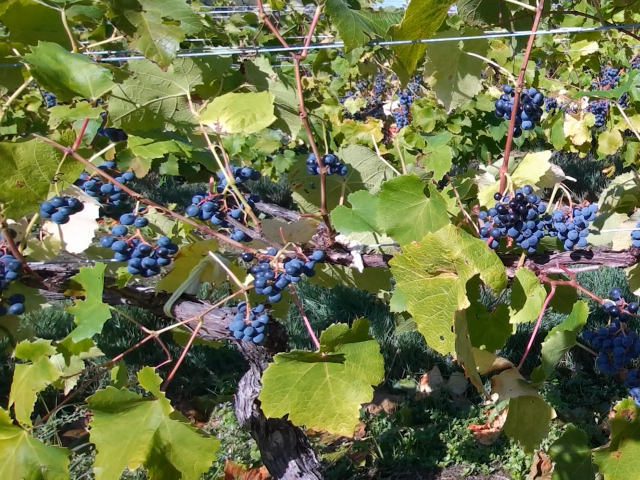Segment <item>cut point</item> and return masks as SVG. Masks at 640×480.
<instances>
[{
    "label": "cut point",
    "mask_w": 640,
    "mask_h": 480,
    "mask_svg": "<svg viewBox=\"0 0 640 480\" xmlns=\"http://www.w3.org/2000/svg\"><path fill=\"white\" fill-rule=\"evenodd\" d=\"M306 113H307L308 116L315 117V118L320 120V122L322 123V128H323L322 138H325L326 137V125H325V121H324L323 117H321L318 114H314V113H310V112H306Z\"/></svg>",
    "instance_id": "6a23745f"
},
{
    "label": "cut point",
    "mask_w": 640,
    "mask_h": 480,
    "mask_svg": "<svg viewBox=\"0 0 640 480\" xmlns=\"http://www.w3.org/2000/svg\"><path fill=\"white\" fill-rule=\"evenodd\" d=\"M67 156H68V153L66 152V153H64V154L62 155V157L60 158L59 163H58V165H57V167H56V173H59V169L61 168L62 164L65 162V160H66Z\"/></svg>",
    "instance_id": "7d7e1d6f"
},
{
    "label": "cut point",
    "mask_w": 640,
    "mask_h": 480,
    "mask_svg": "<svg viewBox=\"0 0 640 480\" xmlns=\"http://www.w3.org/2000/svg\"><path fill=\"white\" fill-rule=\"evenodd\" d=\"M560 189H561V190H563V191H565V192L567 193L568 201H569V202H572V198H571L570 190H569V189H567L566 187L562 186L561 184H560Z\"/></svg>",
    "instance_id": "deb38ca7"
}]
</instances>
